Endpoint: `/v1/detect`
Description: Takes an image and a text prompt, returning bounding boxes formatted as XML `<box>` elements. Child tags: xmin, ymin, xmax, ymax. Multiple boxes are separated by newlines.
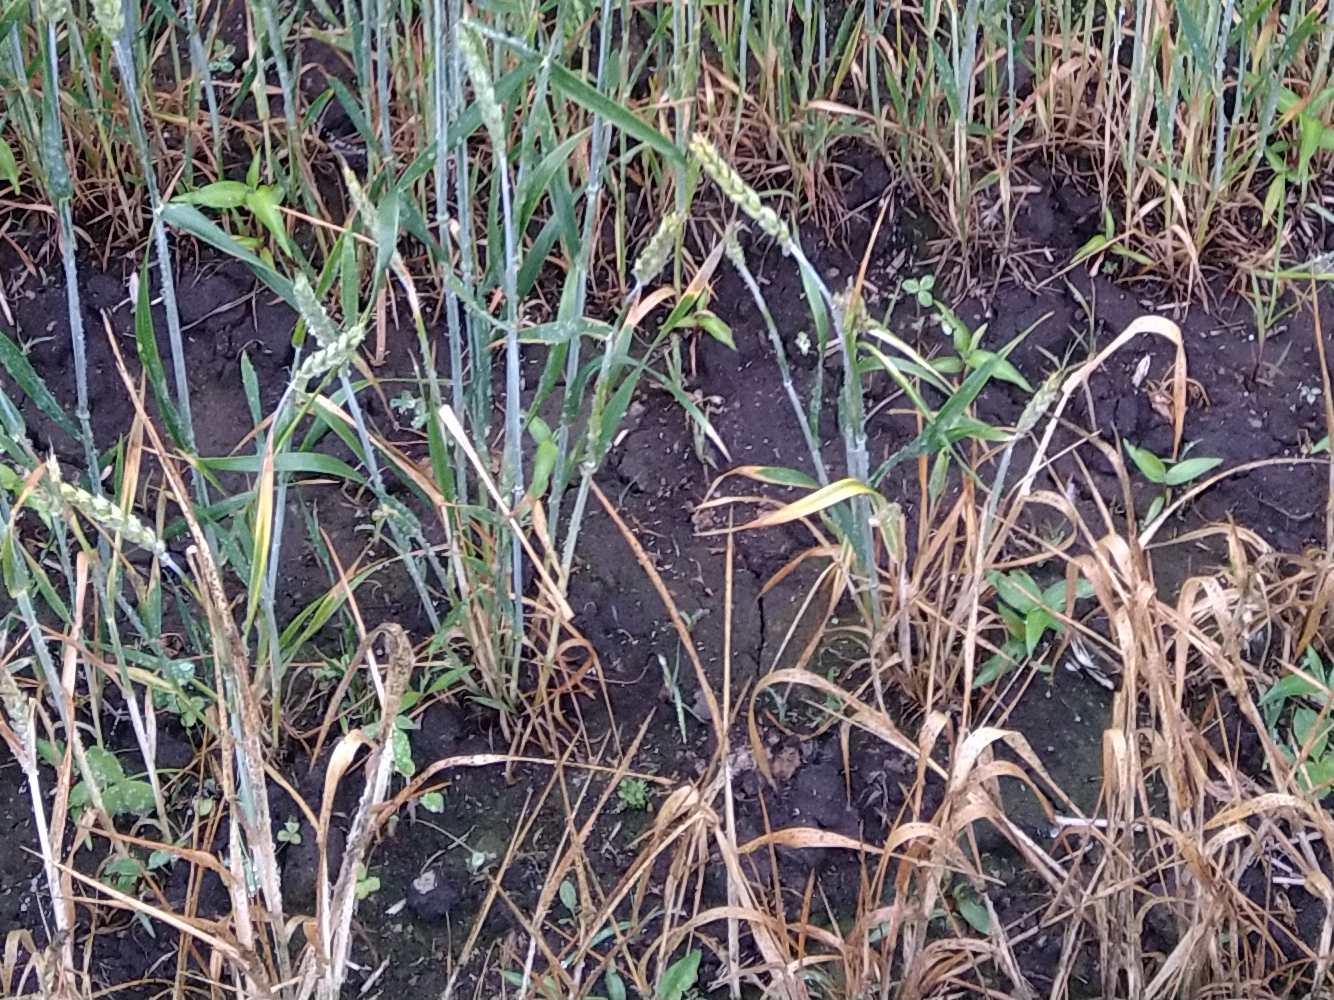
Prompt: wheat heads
<box><xmin>450</xmin><ymin>19</ymin><xmax>508</xmax><ymax>152</ymax></box>
<box><xmin>1021</xmin><ymin>371</ymin><xmax>1065</xmax><ymax>439</ymax></box>
<box><xmin>632</xmin><ymin>212</ymin><xmax>679</xmax><ymax>280</ymax></box>
<box><xmin>300</xmin><ymin>322</ymin><xmax>364</xmax><ymax>375</ymax></box>
<box><xmin>51</xmin><ymin>481</ymin><xmax>165</xmax><ymax>553</ymax></box>
<box><xmin>686</xmin><ymin>133</ymin><xmax>788</xmax><ymax>246</ymax></box>
<box><xmin>0</xmin><ymin>655</ymin><xmax>28</xmax><ymax>734</ymax></box>
<box><xmin>291</xmin><ymin>279</ymin><xmax>350</xmax><ymax>369</ymax></box>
